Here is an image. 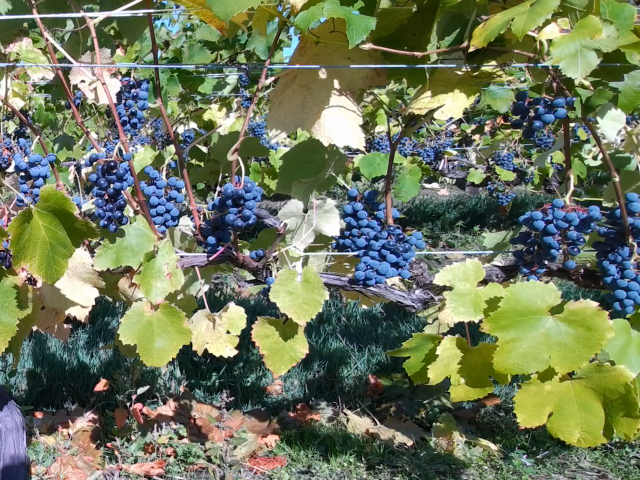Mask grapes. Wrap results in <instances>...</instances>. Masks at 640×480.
<instances>
[{
	"mask_svg": "<svg viewBox=\"0 0 640 480\" xmlns=\"http://www.w3.org/2000/svg\"><path fill=\"white\" fill-rule=\"evenodd\" d=\"M16 145L23 149V153L28 156L27 162H25L21 153L13 155L14 170L26 174L18 178L20 195L23 198L16 195V206H26L24 199L32 201V205H35L39 199L41 188L45 186V180L51 176L49 164L57 160V155L53 152H49L45 156L40 153L32 154V151L28 148L29 143L24 138L18 139Z\"/></svg>",
	"mask_w": 640,
	"mask_h": 480,
	"instance_id": "grapes-8",
	"label": "grapes"
},
{
	"mask_svg": "<svg viewBox=\"0 0 640 480\" xmlns=\"http://www.w3.org/2000/svg\"><path fill=\"white\" fill-rule=\"evenodd\" d=\"M625 209L627 211V224L629 231L633 233V241L638 245L636 253L640 255V195L635 192L625 194Z\"/></svg>",
	"mask_w": 640,
	"mask_h": 480,
	"instance_id": "grapes-10",
	"label": "grapes"
},
{
	"mask_svg": "<svg viewBox=\"0 0 640 480\" xmlns=\"http://www.w3.org/2000/svg\"><path fill=\"white\" fill-rule=\"evenodd\" d=\"M275 283V278L274 277H270L266 280V285L267 287L263 288L262 290V295L264 297H268V293L270 292V286L273 285Z\"/></svg>",
	"mask_w": 640,
	"mask_h": 480,
	"instance_id": "grapes-13",
	"label": "grapes"
},
{
	"mask_svg": "<svg viewBox=\"0 0 640 480\" xmlns=\"http://www.w3.org/2000/svg\"><path fill=\"white\" fill-rule=\"evenodd\" d=\"M604 223L597 235L604 241H594L592 247L598 250L596 268L604 278V301L617 312L633 313L640 305V265L630 261L632 251L625 241L623 214L619 206L604 214Z\"/></svg>",
	"mask_w": 640,
	"mask_h": 480,
	"instance_id": "grapes-3",
	"label": "grapes"
},
{
	"mask_svg": "<svg viewBox=\"0 0 640 480\" xmlns=\"http://www.w3.org/2000/svg\"><path fill=\"white\" fill-rule=\"evenodd\" d=\"M243 188L235 189L234 185L227 183L221 189L222 197H216L207 204V211L224 213L228 208V214L215 216L211 220L201 223V233L206 243L200 246L210 252H215L219 243L230 241V229L238 230L251 227L256 224L257 203L262 201L263 187L256 186L255 181H250L249 176L244 177Z\"/></svg>",
	"mask_w": 640,
	"mask_h": 480,
	"instance_id": "grapes-4",
	"label": "grapes"
},
{
	"mask_svg": "<svg viewBox=\"0 0 640 480\" xmlns=\"http://www.w3.org/2000/svg\"><path fill=\"white\" fill-rule=\"evenodd\" d=\"M4 250H0V265H4L5 269H10L12 267V255H10V250H8V241L2 240Z\"/></svg>",
	"mask_w": 640,
	"mask_h": 480,
	"instance_id": "grapes-11",
	"label": "grapes"
},
{
	"mask_svg": "<svg viewBox=\"0 0 640 480\" xmlns=\"http://www.w3.org/2000/svg\"><path fill=\"white\" fill-rule=\"evenodd\" d=\"M133 157L132 152L124 153V161L119 163L117 160H110L105 164H98L96 171L88 175V180L97 184L91 189V195L95 198L93 205L97 207L94 216L101 219L99 227L108 229L111 233L119 231L118 224L125 226L128 223V216L123 213L127 206L123 191L134 185L128 164Z\"/></svg>",
	"mask_w": 640,
	"mask_h": 480,
	"instance_id": "grapes-5",
	"label": "grapes"
},
{
	"mask_svg": "<svg viewBox=\"0 0 640 480\" xmlns=\"http://www.w3.org/2000/svg\"><path fill=\"white\" fill-rule=\"evenodd\" d=\"M377 190H365L362 200L351 201L342 207V221L346 231L333 238L332 248L337 251H357L360 259L354 266V282L372 286L384 283L398 275L402 279L411 276L410 262L417 249H423L426 241L420 231L412 236L401 228L384 225L386 204L376 202Z\"/></svg>",
	"mask_w": 640,
	"mask_h": 480,
	"instance_id": "grapes-1",
	"label": "grapes"
},
{
	"mask_svg": "<svg viewBox=\"0 0 640 480\" xmlns=\"http://www.w3.org/2000/svg\"><path fill=\"white\" fill-rule=\"evenodd\" d=\"M121 82H128V86L124 91V96L127 99L125 103H119L116 106V111L120 116L123 129L129 131L132 128L139 126V121L145 118V113L150 107L148 100L149 96V79H140L138 81L132 80L131 77L123 76Z\"/></svg>",
	"mask_w": 640,
	"mask_h": 480,
	"instance_id": "grapes-9",
	"label": "grapes"
},
{
	"mask_svg": "<svg viewBox=\"0 0 640 480\" xmlns=\"http://www.w3.org/2000/svg\"><path fill=\"white\" fill-rule=\"evenodd\" d=\"M143 173L151 178L149 185L144 181L140 182L143 194L149 197L147 206L150 216L154 225H159L157 230L166 233L170 227L179 225L180 211L172 201L185 202V195L179 193V189L185 188L184 180L170 177L166 181L162 179L163 174L152 166H145Z\"/></svg>",
	"mask_w": 640,
	"mask_h": 480,
	"instance_id": "grapes-7",
	"label": "grapes"
},
{
	"mask_svg": "<svg viewBox=\"0 0 640 480\" xmlns=\"http://www.w3.org/2000/svg\"><path fill=\"white\" fill-rule=\"evenodd\" d=\"M563 199H552L550 205L542 210H528L517 217L520 225L525 224L533 232L541 234L539 238L532 237L530 231H522L518 236L510 239L512 246L523 244L525 253L531 256L525 264L524 252L516 249L512 252L513 265L519 268L522 275H527L526 279L540 281L538 275L544 274L548 263H555L560 254V243L557 237L564 231V237L568 241L566 254L571 257L580 255L578 246L586 243L584 233H592L597 227V222L603 220L602 208L596 205H588L583 210L576 212H565Z\"/></svg>",
	"mask_w": 640,
	"mask_h": 480,
	"instance_id": "grapes-2",
	"label": "grapes"
},
{
	"mask_svg": "<svg viewBox=\"0 0 640 480\" xmlns=\"http://www.w3.org/2000/svg\"><path fill=\"white\" fill-rule=\"evenodd\" d=\"M105 158H106V154L104 152H97L96 154L95 153H91L88 156V158H85L83 160V165L86 168H90L98 161V159L104 160Z\"/></svg>",
	"mask_w": 640,
	"mask_h": 480,
	"instance_id": "grapes-12",
	"label": "grapes"
},
{
	"mask_svg": "<svg viewBox=\"0 0 640 480\" xmlns=\"http://www.w3.org/2000/svg\"><path fill=\"white\" fill-rule=\"evenodd\" d=\"M530 92L527 89L518 91L515 94V102L510 107V115L517 117L510 123L512 130H519L523 127L524 122L527 125L521 132L523 139H532L535 134L544 126H550L557 120H566L568 118L567 106L571 107L577 102L575 96L567 97H549L539 96L528 101Z\"/></svg>",
	"mask_w": 640,
	"mask_h": 480,
	"instance_id": "grapes-6",
	"label": "grapes"
}]
</instances>
